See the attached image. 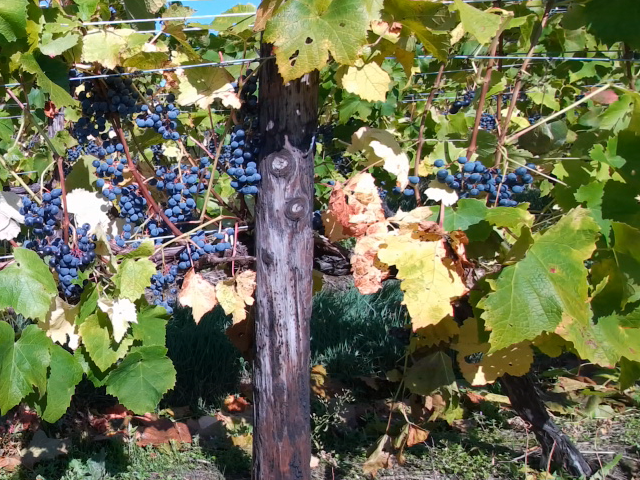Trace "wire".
<instances>
[{"mask_svg":"<svg viewBox=\"0 0 640 480\" xmlns=\"http://www.w3.org/2000/svg\"><path fill=\"white\" fill-rule=\"evenodd\" d=\"M254 11H242L236 13H211L207 15H191L187 17H134V18H114L102 21H84V26H104L116 23H136V22H189L194 20H209L213 18H238L244 16H254Z\"/></svg>","mask_w":640,"mask_h":480,"instance_id":"obj_3","label":"wire"},{"mask_svg":"<svg viewBox=\"0 0 640 480\" xmlns=\"http://www.w3.org/2000/svg\"><path fill=\"white\" fill-rule=\"evenodd\" d=\"M452 60H473V59H504V60H568L586 63L595 62H621L635 61L640 62L637 56H619V57H579L570 55H506V54H471V55H452Z\"/></svg>","mask_w":640,"mask_h":480,"instance_id":"obj_2","label":"wire"},{"mask_svg":"<svg viewBox=\"0 0 640 480\" xmlns=\"http://www.w3.org/2000/svg\"><path fill=\"white\" fill-rule=\"evenodd\" d=\"M173 238H174L173 234H157L152 236H142V237L127 239L126 243L134 244L137 242L154 241V240H160V239H173Z\"/></svg>","mask_w":640,"mask_h":480,"instance_id":"obj_4","label":"wire"},{"mask_svg":"<svg viewBox=\"0 0 640 480\" xmlns=\"http://www.w3.org/2000/svg\"><path fill=\"white\" fill-rule=\"evenodd\" d=\"M273 54H263L258 56H253L252 58H239V59H230V60H219L215 62H203L196 65H176L172 67L165 68H150V69H142V70H134L130 72L119 73H103V74H92L85 75L81 77H69V82H83L87 80L94 79H105V78H126L132 77L136 75H145V74H153V73H167L174 72L178 70H198L205 67H217L221 65H232V64H241V63H254L256 61L265 60V59H273Z\"/></svg>","mask_w":640,"mask_h":480,"instance_id":"obj_1","label":"wire"}]
</instances>
